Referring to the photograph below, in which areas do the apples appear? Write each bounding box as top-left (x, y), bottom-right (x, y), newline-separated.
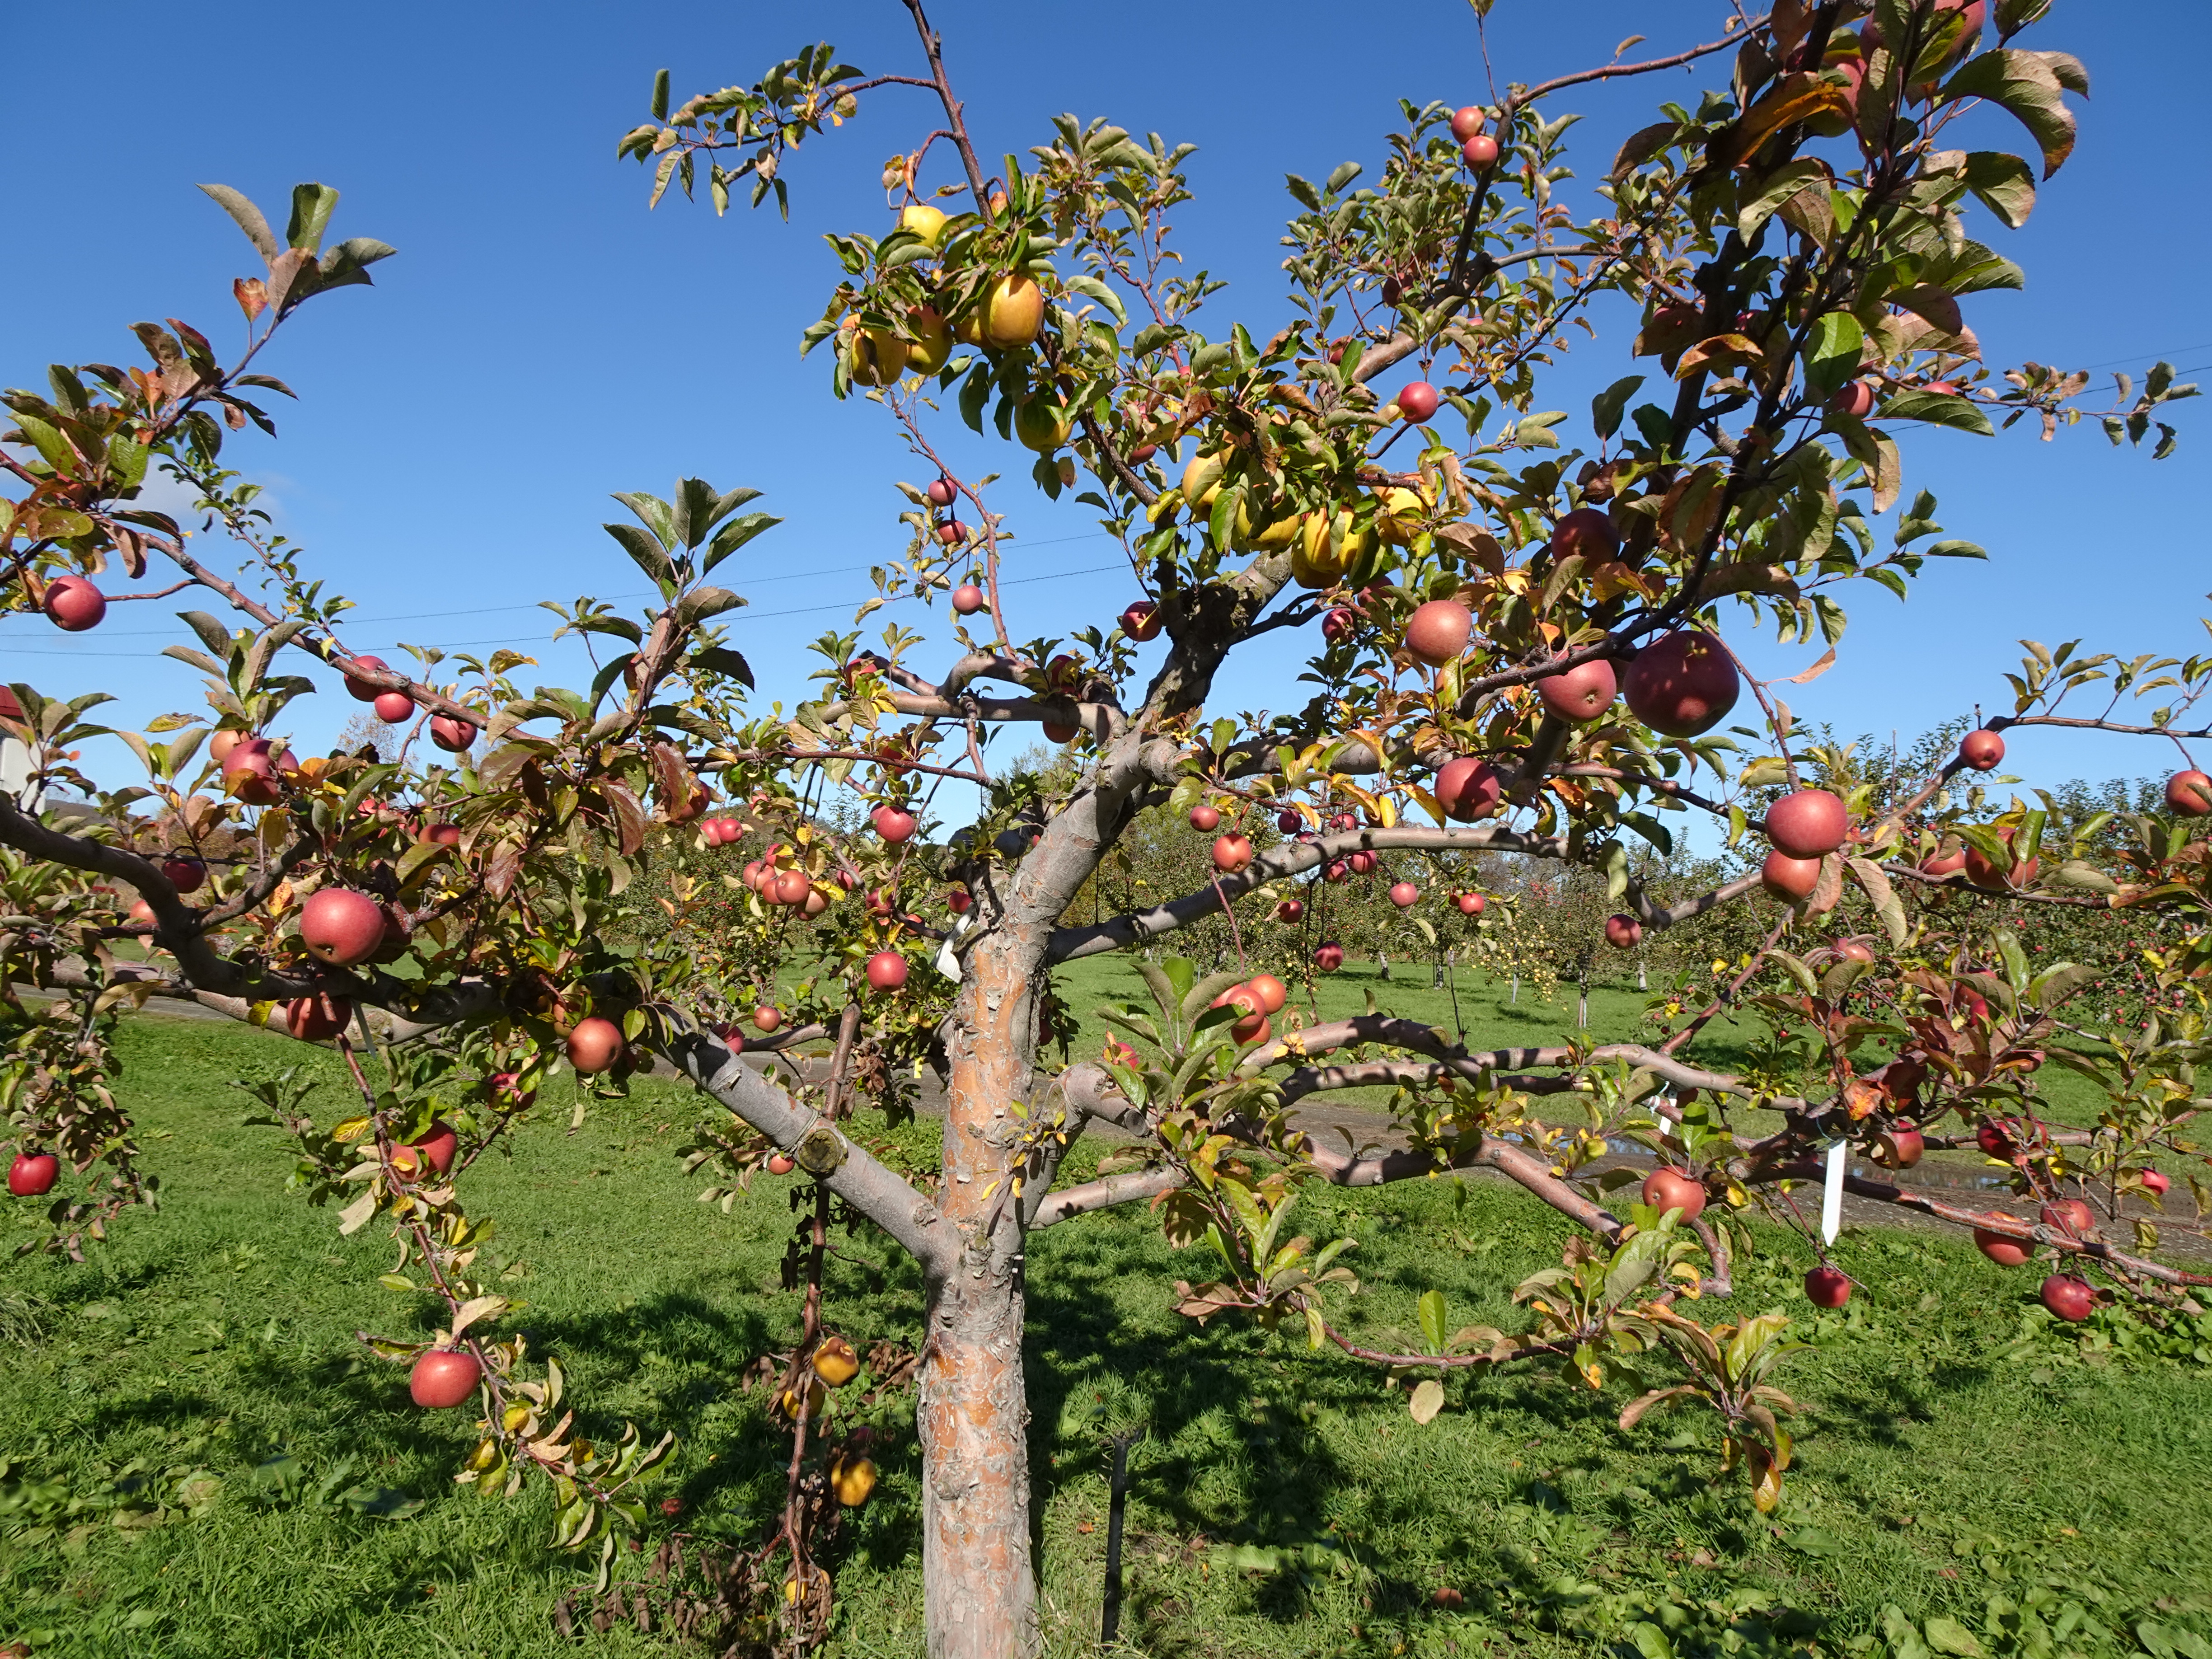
top-left (1651, 306), bottom-right (1690, 342)
top-left (1523, 929), bottom-right (1529, 934)
top-left (762, 879), bottom-right (788, 904)
top-left (1405, 600), bottom-right (1472, 670)
top-left (1461, 318), bottom-right (1490, 350)
top-left (1672, 995), bottom-right (1681, 1004)
top-left (1122, 597), bottom-right (1165, 642)
top-left (2111, 823), bottom-right (2120, 829)
top-left (2146, 995), bottom-right (2154, 1003)
top-left (1357, 572), bottom-right (1398, 619)
top-left (1731, 307), bottom-right (1775, 352)
top-left (854, 1389), bottom-right (886, 1418)
top-left (298, 888), bottom-right (385, 968)
top-left (1520, 958), bottom-right (1530, 967)
top-left (2185, 923), bottom-right (2193, 932)
top-left (160, 854), bottom-right (206, 895)
top-left (2159, 945), bottom-right (2167, 953)
top-left (1246, 974), bottom-right (1287, 1015)
top-left (1551, 508), bottom-right (1623, 580)
top-left (43, 575), bottom-right (106, 632)
top-left (1278, 880), bottom-right (1288, 890)
top-left (1207, 979), bottom-right (1243, 1014)
top-left (1460, 941), bottom-right (1467, 948)
top-left (1371, 472), bottom-right (1433, 549)
top-left (691, 905), bottom-right (702, 914)
top-left (2150, 986), bottom-right (2162, 998)
top-left (1304, 511), bottom-right (1364, 573)
top-left (2141, 1020), bottom-right (2151, 1029)
top-left (2094, 980), bottom-right (2105, 989)
top-left (1951, 1091), bottom-right (1989, 1121)
top-left (1711, 973), bottom-right (1721, 983)
top-left (1736, 1003), bottom-right (1746, 1013)
top-left (720, 898), bottom-right (726, 906)
top-left (1471, 962), bottom-right (1477, 971)
top-left (1660, 1025), bottom-right (1673, 1035)
top-left (1761, 840), bottom-right (1822, 906)
top-left (1498, 920), bottom-right (1504, 926)
top-left (1927, 821), bottom-right (1939, 834)
top-left (374, 685), bottom-right (416, 723)
top-left (929, 477), bottom-right (958, 507)
top-left (2136, 973), bottom-right (2146, 980)
top-left (1277, 801), bottom-right (1318, 837)
top-left (499, 801), bottom-right (538, 831)
top-left (775, 869), bottom-right (811, 904)
top-left (1517, 941), bottom-right (1525, 947)
top-left (1912, 837), bottom-right (1922, 848)
top-left (800, 880), bottom-right (832, 913)
top-left (1605, 913), bottom-right (1644, 951)
top-left (419, 822), bottom-right (467, 862)
top-left (1451, 106), bottom-right (1485, 147)
top-left (1102, 1040), bottom-right (1141, 1074)
top-left (835, 313), bottom-right (908, 388)
top-left (2115, 875), bottom-right (2125, 886)
top-left (386, 1116), bottom-right (462, 1185)
top-left (2017, 919), bottom-right (2027, 930)
top-left (1299, 1265), bottom-right (1313, 1278)
top-left (1303, 977), bottom-right (1311, 984)
top-left (829, 1452), bottom-right (881, 1507)
top-left (1540, 924), bottom-right (1545, 930)
top-left (492, 1029), bottom-right (519, 1052)
top-left (655, 786), bottom-right (691, 827)
top-left (1030, 992), bottom-right (1054, 1020)
top-left (1778, 36), bottom-right (1871, 139)
top-left (2205, 832), bottom-right (2212, 845)
top-left (344, 654), bottom-right (394, 704)
top-left (1944, 989), bottom-right (1996, 1030)
top-left (2147, 941), bottom-right (2156, 948)
top-left (274, 950), bottom-right (305, 981)
top-left (319, 1152), bottom-right (359, 1181)
top-left (1389, 952), bottom-right (1396, 960)
top-left (569, 1020), bottom-right (624, 1074)
top-left (1481, 962), bottom-right (1487, 966)
top-left (2173, 990), bottom-right (2182, 999)
top-left (1960, 727), bottom-right (2006, 772)
top-left (351, 797), bottom-right (388, 826)
top-left (1286, 406), bottom-right (1321, 436)
top-left (783, 1563), bottom-right (832, 1610)
top-left (1922, 839), bottom-right (1967, 880)
top-left (947, 889), bottom-right (975, 913)
top-left (1309, 986), bottom-right (1318, 995)
top-left (1953, 967), bottom-right (2000, 1007)
top-left (285, 984), bottom-right (355, 1042)
top-left (2119, 989), bottom-right (2127, 999)
top-left (1792, 1140), bottom-right (1820, 1166)
top-left (866, 951), bottom-right (907, 995)
top-left (2063, 998), bottom-right (2075, 1008)
top-left (1548, 954), bottom-right (1556, 960)
top-left (209, 725), bottom-right (256, 766)
top-left (1286, 972), bottom-right (1294, 980)
top-left (2041, 1271), bottom-right (2095, 1323)
top-left (1118, 431), bottom-right (1158, 468)
top-left (0, 1637), bottom-right (33, 1659)
top-left (1228, 1066), bottom-right (1256, 1088)
top-left (2136, 1166), bottom-right (2171, 1200)
top-left (1502, 965), bottom-right (1510, 972)
top-left (742, 860), bottom-right (778, 892)
top-left (129, 899), bottom-right (172, 936)
top-left (752, 1005), bottom-right (782, 1034)
top-left (1302, 965), bottom-right (1311, 977)
top-left (1029, 829), bottom-right (1049, 850)
top-left (1870, 1001), bottom-right (1879, 1012)
top-left (1300, 941), bottom-right (1307, 949)
top-left (698, 817), bottom-right (725, 848)
top-left (1798, 337), bottom-right (1826, 366)
top-left (863, 885), bottom-right (895, 914)
top-left (766, 841), bottom-right (791, 867)
top-left (474, 842), bottom-right (501, 869)
top-left (1857, 0), bottom-right (1987, 87)
top-left (850, 1425), bottom-right (880, 1455)
top-left (1984, 949), bottom-right (1995, 957)
top-left (925, 268), bottom-right (963, 300)
top-left (2117, 955), bottom-right (2125, 962)
top-left (1277, 899), bottom-right (1305, 926)
top-left (1542, 985), bottom-right (1548, 992)
top-left (1623, 629), bottom-right (1740, 740)
top-left (2175, 1000), bottom-right (2185, 1008)
top-left (1388, 881), bottom-right (1419, 906)
top-left (1205, 1171), bottom-right (1221, 1185)
top-left (1829, 936), bottom-right (1877, 982)
top-left (1319, 857), bottom-right (1351, 884)
top-left (1459, 891), bottom-right (1486, 917)
top-left (1322, 609), bottom-right (1362, 646)
top-left (1976, 1114), bottom-right (2023, 1159)
top-left (2036, 944), bottom-right (2046, 953)
top-left (696, 866), bottom-right (702, 873)
top-left (1664, 1012), bottom-right (1677, 1021)
top-left (1474, 568), bottom-right (1541, 630)
top-left (1512, 706), bottom-right (1543, 740)
top-left (866, 1075), bottom-right (885, 1093)
top-left (2102, 911), bottom-right (2110, 919)
top-left (620, 1536), bottom-right (642, 1557)
top-left (1384, 250), bottom-right (1423, 285)
top-left (1768, 0), bottom-right (1815, 46)
top-left (717, 820), bottom-right (746, 845)
top-left (55, 464), bottom-right (86, 501)
top-left (1404, 952), bottom-right (1411, 959)
top-left (2130, 940), bottom-right (2138, 949)
top-left (410, 1350), bottom-right (483, 1408)
top-left (750, 975), bottom-right (763, 988)
top-left (1535, 645), bottom-right (1618, 724)
top-left (1776, 154), bottom-right (1839, 211)
top-left (222, 739), bottom-right (301, 808)
top-left (1755, 964), bottom-right (1766, 973)
top-left (1329, 813), bottom-right (1357, 836)
top-left (1651, 1011), bottom-right (1662, 1022)
top-left (1693, 1547), bottom-right (1717, 1568)
top-left (1177, 365), bottom-right (1203, 392)
top-left (1510, 980), bottom-right (1515, 985)
top-left (933, 518), bottom-right (968, 548)
top-left (1347, 850), bottom-right (1380, 874)
top-left (1435, 757), bottom-right (1501, 822)
top-left (553, 993), bottom-right (600, 1041)
top-left (1463, 135), bottom-right (1498, 173)
top-left (877, 738), bottom-right (919, 776)
top-left (1829, 381), bottom-right (1874, 423)
top-left (1293, 542), bottom-right (1348, 589)
top-left (1327, 335), bottom-right (1361, 368)
top-left (1766, 789), bottom-right (1849, 860)
top-left (1527, 942), bottom-right (1536, 949)
top-left (1546, 997), bottom-right (1554, 1004)
top-left (952, 584), bottom-right (982, 617)
top-left (2165, 769), bottom-right (2212, 817)
top-left (1798, 297), bottom-right (1826, 326)
top-left (900, 913), bottom-right (925, 936)
top-left (1041, 696), bottom-right (1083, 746)
top-left (1256, 957), bottom-right (1265, 966)
top-left (811, 1337), bottom-right (861, 1387)
top-left (1470, 943), bottom-right (1477, 950)
top-left (491, 1073), bottom-right (538, 1112)
top-left (1804, 1264), bottom-right (1852, 1310)
top-left (621, 652), bottom-right (659, 693)
top-left (1212, 831), bottom-right (1255, 874)
top-left (1679, 1008), bottom-right (1691, 1016)
top-left (705, 1022), bottom-right (746, 1059)
top-left (1387, 269), bottom-right (1418, 300)
top-left (1642, 1163), bottom-right (1707, 1228)
top-left (867, 800), bottom-right (897, 828)
top-left (1887, 991), bottom-right (1895, 999)
top-left (1286, 961), bottom-right (1295, 969)
top-left (979, 273), bottom-right (1044, 354)
top-left (1022, 1014), bottom-right (1055, 1048)
top-left (430, 703), bottom-right (480, 754)
top-left (783, 1377), bottom-right (825, 1421)
top-left (726, 940), bottom-right (733, 948)
top-left (1289, 830), bottom-right (1320, 859)
top-left (2118, 1018), bottom-right (2127, 1025)
top-left (748, 791), bottom-right (775, 816)
top-left (1662, 1070), bottom-right (1703, 1111)
top-left (2042, 1198), bottom-right (2097, 1244)
top-left (770, 1396), bottom-right (802, 1431)
top-left (1397, 381), bottom-right (1442, 425)
top-left (1918, 380), bottom-right (1959, 416)
top-left (1490, 748), bottom-right (1515, 776)
top-left (1182, 445), bottom-right (1252, 520)
top-left (2011, 1043), bottom-right (2047, 1073)
top-left (2103, 825), bottom-right (2112, 834)
top-left (660, 1498), bottom-right (693, 1525)
top-left (1972, 1002), bottom-right (2017, 1041)
top-left (9, 1143), bottom-right (62, 1197)
top-left (835, 860), bottom-right (866, 892)
top-left (2149, 930), bottom-right (2157, 939)
top-left (1234, 483), bottom-right (1302, 552)
top-left (1225, 989), bottom-right (1266, 1031)
top-left (1551, 971), bottom-right (1557, 977)
top-left (664, 878), bottom-right (671, 885)
top-left (1779, 1029), bottom-right (1790, 1039)
top-left (1973, 1209), bottom-right (2038, 1268)
top-left (1509, 941), bottom-right (1516, 948)
top-left (1905, 827), bottom-right (1913, 837)
top-left (2091, 888), bottom-right (2098, 897)
top-left (2121, 918), bottom-right (2131, 926)
top-left (1766, 38), bottom-right (1812, 76)
top-left (1249, 405), bottom-right (1290, 445)
top-left (1434, 1586), bottom-right (1463, 1614)
top-left (1534, 967), bottom-right (1541, 975)
top-left (1500, 949), bottom-right (1506, 955)
top-left (1015, 389), bottom-right (1075, 454)
top-left (875, 915), bottom-right (894, 940)
top-left (1586, 630), bottom-right (1641, 693)
top-left (1413, 231), bottom-right (1444, 265)
top-left (1188, 804), bottom-right (1222, 834)
top-left (1852, 825), bottom-right (1864, 836)
top-left (900, 302), bottom-right (954, 375)
top-left (490, 964), bottom-right (517, 986)
top-left (375, 810), bottom-right (415, 856)
top-left (1864, 1118), bottom-right (1926, 1171)
top-left (895, 205), bottom-right (949, 256)
top-left (412, 1193), bottom-right (458, 1232)
top-left (316, 826), bottom-right (338, 852)
top-left (700, 1000), bottom-right (723, 1020)
top-left (526, 1053), bottom-right (548, 1076)
top-left (1534, 974), bottom-right (1545, 984)
top-left (1309, 1020), bottom-right (1337, 1055)
top-left (1123, 400), bottom-right (1157, 431)
top-left (2115, 1006), bottom-right (2124, 1015)
top-left (1229, 1015), bottom-right (1273, 1051)
top-left (1965, 826), bottom-right (2040, 892)
top-left (777, 1421), bottom-right (816, 1451)
top-left (1837, 340), bottom-right (1876, 380)
top-left (1147, 410), bottom-right (1180, 438)
top-left (2014, 1115), bottom-right (2048, 1153)
top-left (845, 658), bottom-right (880, 689)
top-left (876, 806), bottom-right (918, 841)
top-left (1043, 654), bottom-right (1081, 688)
top-left (1316, 941), bottom-right (1346, 972)
top-left (956, 303), bottom-right (999, 349)
top-left (1626, 1296), bottom-right (1656, 1324)
top-left (671, 780), bottom-right (711, 820)
top-left (1881, 1083), bottom-right (1922, 1110)
top-left (768, 1145), bottom-right (798, 1177)
top-left (352, 897), bottom-right (415, 965)
top-left (1299, 494), bottom-right (1319, 524)
top-left (1561, 1005), bottom-right (1569, 1011)
top-left (1687, 985), bottom-right (1697, 994)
